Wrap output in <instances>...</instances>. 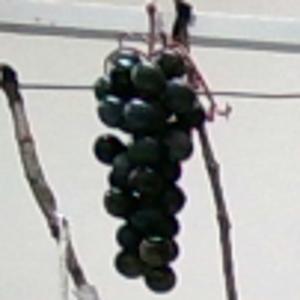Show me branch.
<instances>
[{
	"mask_svg": "<svg viewBox=\"0 0 300 300\" xmlns=\"http://www.w3.org/2000/svg\"><path fill=\"white\" fill-rule=\"evenodd\" d=\"M0 89L12 116L14 140L18 147L20 164L27 186L38 208L46 219L51 239L61 248L65 256V269L80 294V300H102L95 286L89 284L84 269L75 254L68 217L58 216L57 201L44 174L36 143L27 121L24 98L20 91L18 72L6 62H0Z\"/></svg>",
	"mask_w": 300,
	"mask_h": 300,
	"instance_id": "branch-1",
	"label": "branch"
},
{
	"mask_svg": "<svg viewBox=\"0 0 300 300\" xmlns=\"http://www.w3.org/2000/svg\"><path fill=\"white\" fill-rule=\"evenodd\" d=\"M174 5V20L171 24L170 39L174 50L184 54L188 61L186 71V84L195 88L198 94L196 83V69L190 56V27L197 23V15L194 14V6L186 0H172Z\"/></svg>",
	"mask_w": 300,
	"mask_h": 300,
	"instance_id": "branch-3",
	"label": "branch"
},
{
	"mask_svg": "<svg viewBox=\"0 0 300 300\" xmlns=\"http://www.w3.org/2000/svg\"><path fill=\"white\" fill-rule=\"evenodd\" d=\"M194 130L197 134L201 159L204 162V169L207 172L208 181L210 182L211 196L215 204V221L219 229L222 274L225 282V300H239L236 290L235 261L232 260L233 246L230 237L233 223L229 218L227 203L224 197V186L222 187L221 185L220 163L215 158L212 144L209 141L206 119L202 126Z\"/></svg>",
	"mask_w": 300,
	"mask_h": 300,
	"instance_id": "branch-2",
	"label": "branch"
}]
</instances>
